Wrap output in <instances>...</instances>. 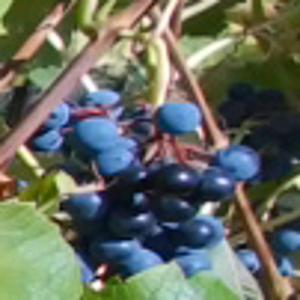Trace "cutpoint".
I'll use <instances>...</instances> for the list:
<instances>
[{
    "mask_svg": "<svg viewBox=\"0 0 300 300\" xmlns=\"http://www.w3.org/2000/svg\"><path fill=\"white\" fill-rule=\"evenodd\" d=\"M120 37L122 39L144 41L155 46L154 52L156 54L159 69L158 102L163 104L167 93L168 76L170 75V62L166 43L158 35L142 31L122 30L120 32Z\"/></svg>",
    "mask_w": 300,
    "mask_h": 300,
    "instance_id": "obj_1",
    "label": "cut point"
}]
</instances>
